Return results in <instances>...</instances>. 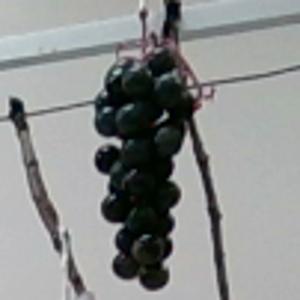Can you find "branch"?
Returning a JSON list of instances; mask_svg holds the SVG:
<instances>
[{"label": "branch", "mask_w": 300, "mask_h": 300, "mask_svg": "<svg viewBox=\"0 0 300 300\" xmlns=\"http://www.w3.org/2000/svg\"><path fill=\"white\" fill-rule=\"evenodd\" d=\"M164 17L160 29V44L169 45L178 51V32L182 21V0H162Z\"/></svg>", "instance_id": "3"}, {"label": "branch", "mask_w": 300, "mask_h": 300, "mask_svg": "<svg viewBox=\"0 0 300 300\" xmlns=\"http://www.w3.org/2000/svg\"><path fill=\"white\" fill-rule=\"evenodd\" d=\"M8 106V117L14 127V134L19 141V155L22 158L23 168L26 172V181L32 203L48 232L51 247L76 297L80 300H96L94 292L88 290L76 265L69 228L66 226V230H64L62 227L60 214H58L53 201L50 200L48 195L30 136V126L25 115L24 100L18 96L8 94Z\"/></svg>", "instance_id": "1"}, {"label": "branch", "mask_w": 300, "mask_h": 300, "mask_svg": "<svg viewBox=\"0 0 300 300\" xmlns=\"http://www.w3.org/2000/svg\"><path fill=\"white\" fill-rule=\"evenodd\" d=\"M184 122L187 126L193 157L203 187L206 216L209 220V232L212 240V263L216 272L215 286L218 292V300H230L228 264L222 233L223 213L220 209L221 206L212 179L211 155L208 152L206 153L194 112L191 118Z\"/></svg>", "instance_id": "2"}]
</instances>
